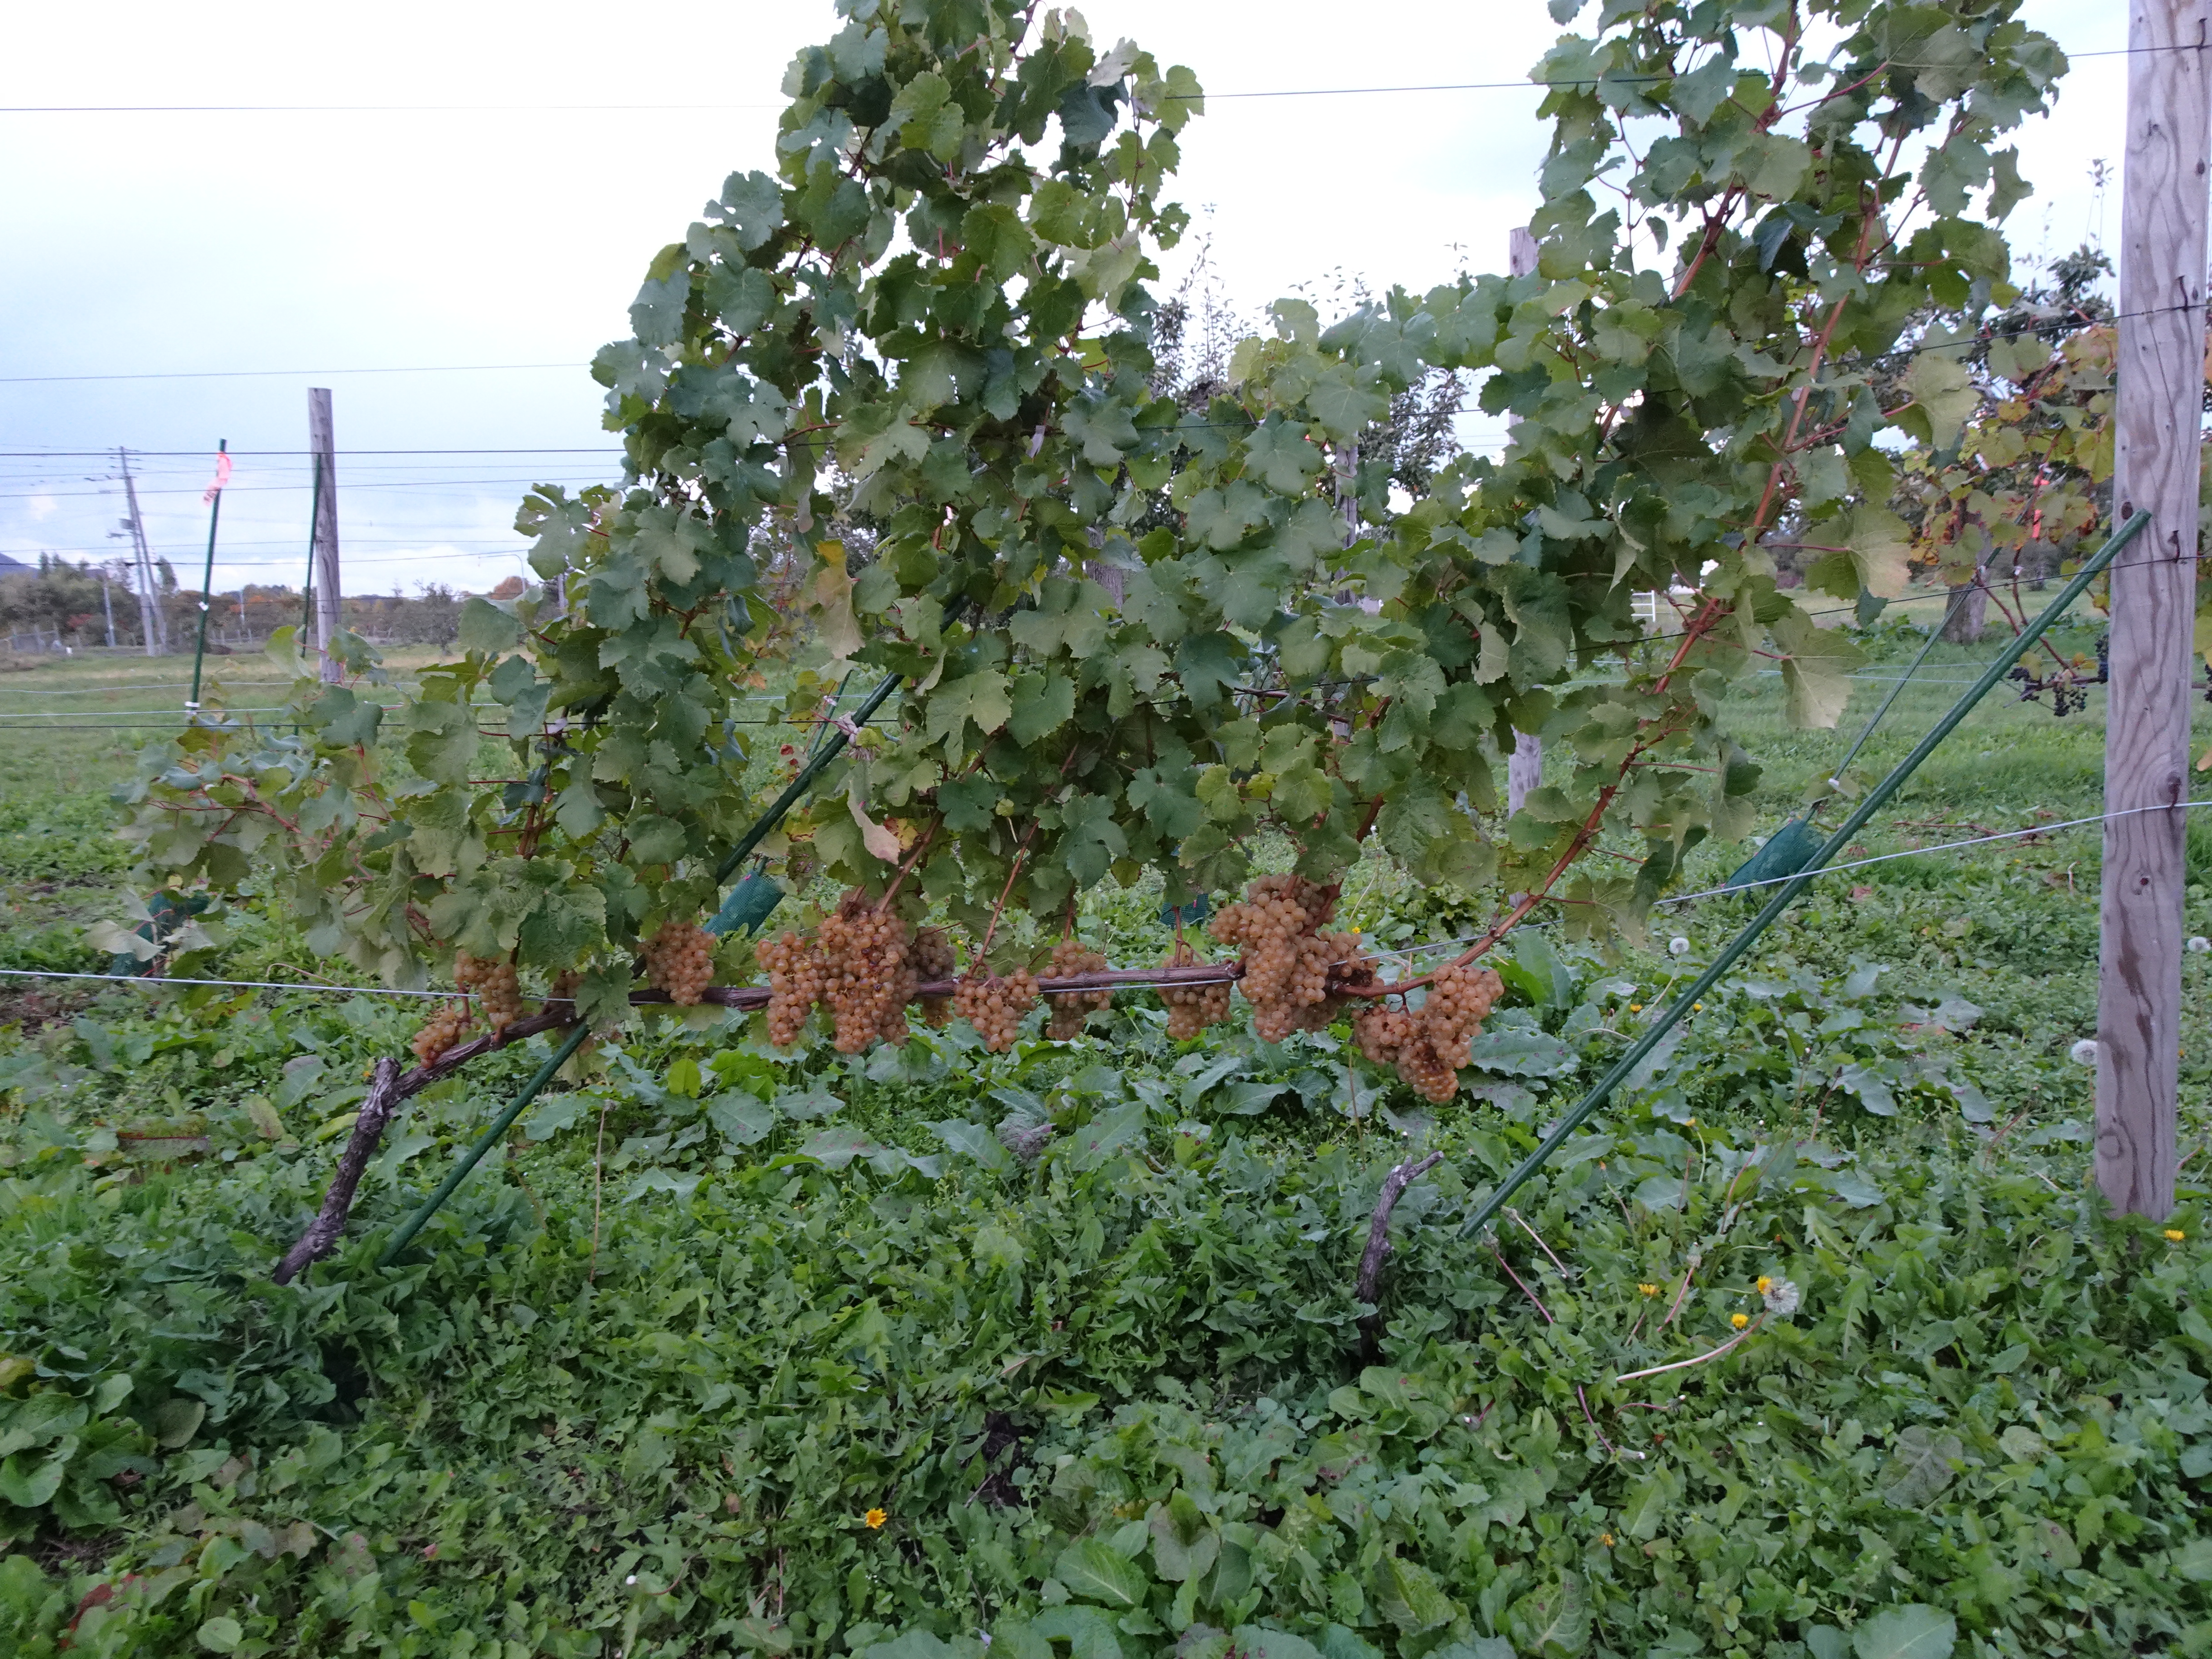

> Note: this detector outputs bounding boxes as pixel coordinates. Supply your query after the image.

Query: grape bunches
[1037,938,1117,1043]
[846,901,914,1005]
[810,916,883,1054]
[1156,949,1232,1044]
[2093,623,2113,688]
[1204,899,1256,946]
[1237,890,1311,1007]
[1351,1001,1460,1106]
[2045,682,2093,718]
[880,1001,916,1048]
[637,919,718,1009]
[833,886,870,919]
[410,1004,483,1070]
[1245,868,1328,918]
[1421,962,1508,1072]
[906,923,958,1032]
[952,963,1038,1057]
[1318,928,1391,991]
[451,946,529,1030]
[1298,996,1338,1037]
[1253,985,1308,1047]
[1288,932,1333,1010]
[2006,663,2047,709]
[752,933,820,1049]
